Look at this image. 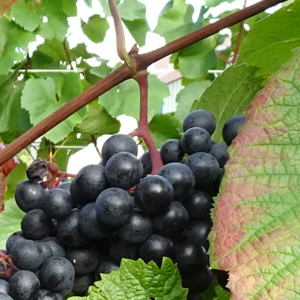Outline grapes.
<instances>
[{"label":"grapes","mask_w":300,"mask_h":300,"mask_svg":"<svg viewBox=\"0 0 300 300\" xmlns=\"http://www.w3.org/2000/svg\"><path fill=\"white\" fill-rule=\"evenodd\" d=\"M245 122L244 114L230 117L219 143L211 139L214 116L197 109L185 117L181 141L167 140L140 159L135 140L114 133L98 165L82 167L71 182L46 189L22 181L14 200L28 213L0 251V300L86 294L124 258L161 268L170 257L191 294L213 279L225 286L227 274L210 270L207 236L227 149Z\"/></svg>","instance_id":"1"}]
</instances>
